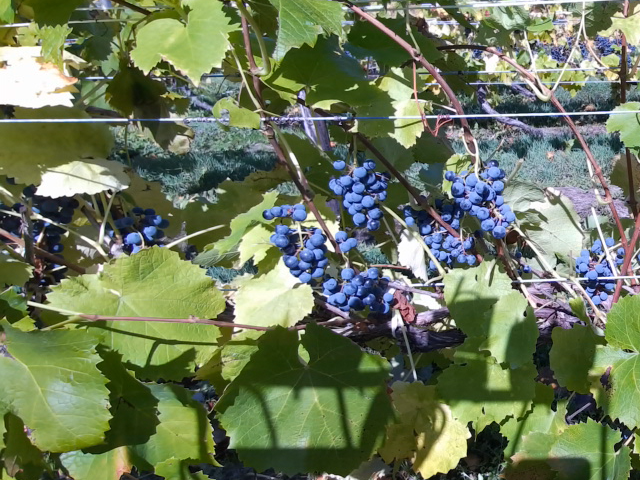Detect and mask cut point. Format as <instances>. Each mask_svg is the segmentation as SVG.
<instances>
[{
  "instance_id": "obj_1",
  "label": "cut point",
  "mask_w": 640,
  "mask_h": 480,
  "mask_svg": "<svg viewBox=\"0 0 640 480\" xmlns=\"http://www.w3.org/2000/svg\"><path fill=\"white\" fill-rule=\"evenodd\" d=\"M460 136H461V140H462V143H463L465 149L468 151L469 154H471L473 156V165L475 167H478L479 166L478 155H479V152H480V142H479V140L477 139V137L475 135H472L473 140L475 142V150H473V149H470L468 147L467 143H466L463 127L460 128Z\"/></svg>"
},
{
  "instance_id": "obj_2",
  "label": "cut point",
  "mask_w": 640,
  "mask_h": 480,
  "mask_svg": "<svg viewBox=\"0 0 640 480\" xmlns=\"http://www.w3.org/2000/svg\"><path fill=\"white\" fill-rule=\"evenodd\" d=\"M353 133H352V137H351V148L353 149L352 157L356 158L358 156V147L356 145V139L357 138L353 136Z\"/></svg>"
}]
</instances>
